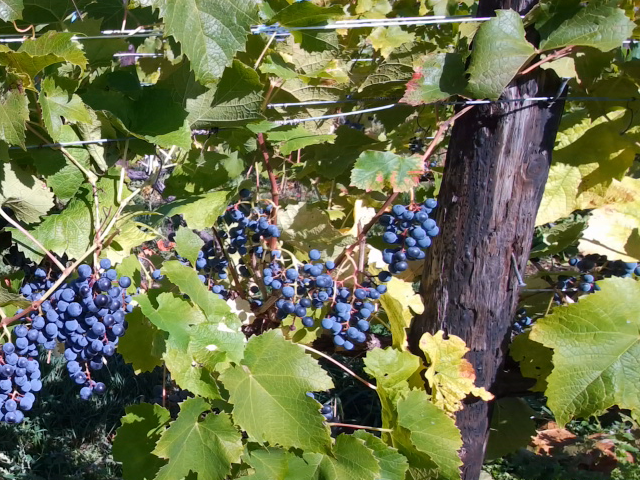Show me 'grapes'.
Masks as SVG:
<instances>
[{
  "instance_id": "grapes-1",
  "label": "grapes",
  "mask_w": 640,
  "mask_h": 480,
  "mask_svg": "<svg viewBox=\"0 0 640 480\" xmlns=\"http://www.w3.org/2000/svg\"><path fill=\"white\" fill-rule=\"evenodd\" d=\"M100 266L107 271L96 281V289L106 295L94 297V286L89 284L93 268L87 264L77 267L73 281L62 284L53 295L42 304L44 317L37 311L30 313L31 329L24 324L16 325L13 333L17 336L15 345L6 342L1 346L7 364L0 366V421L18 423L24 419V413L17 409L13 398H8L14 384L20 386V407L25 411L33 408L36 396L42 388L41 369L37 344L46 350L56 347V341L65 343L64 356L69 376L77 385L87 382L82 364L77 362L78 355L89 362L93 370L104 367L102 353L115 354L118 337L127 329L125 315L133 310L131 295L124 288L131 284L126 276L119 278L122 288L112 287L110 280L117 278V271L111 268V260L104 258Z\"/></svg>"
},
{
  "instance_id": "grapes-2",
  "label": "grapes",
  "mask_w": 640,
  "mask_h": 480,
  "mask_svg": "<svg viewBox=\"0 0 640 480\" xmlns=\"http://www.w3.org/2000/svg\"><path fill=\"white\" fill-rule=\"evenodd\" d=\"M439 206L437 199H427L420 206V211L407 209L405 204H395L393 212L385 217L387 229L384 232V242L386 244L396 243L399 233L403 229L409 228V235L406 239V252L402 248H384L382 250V261L388 265V270H382L377 274V279L381 282H390L392 274H399L408 269V260L419 261L425 257V252L432 245V237L440 234V227L434 218H430V213Z\"/></svg>"
},
{
  "instance_id": "grapes-3",
  "label": "grapes",
  "mask_w": 640,
  "mask_h": 480,
  "mask_svg": "<svg viewBox=\"0 0 640 480\" xmlns=\"http://www.w3.org/2000/svg\"><path fill=\"white\" fill-rule=\"evenodd\" d=\"M280 270V263L278 261H271L267 268H263L261 270V276L263 279V284L265 286H270L275 290H280L282 288V294L285 297H292L294 295V289L289 286H284L286 283H293V280H297L301 285V288H304L305 283L317 285L318 287H323V291L314 292L312 294V301L307 298H302L298 303H291L290 301H284L283 299H278L276 301V306L279 308L277 312V317L279 319H284L286 314L294 313L297 317H304L302 319V324L306 327H312L314 325V319L311 316L306 315V308H310L313 306L317 309H323L325 307V301L328 297H332L334 295V283L333 278L330 274H326L322 272L324 270V265L322 263H317L316 265L306 264L304 266V271L306 273H310L311 276L315 277V281H310V279H298L299 273H302L301 267L296 269H287L285 271L286 281H282L277 278H272L274 272H278Z\"/></svg>"
},
{
  "instance_id": "grapes-4",
  "label": "grapes",
  "mask_w": 640,
  "mask_h": 480,
  "mask_svg": "<svg viewBox=\"0 0 640 480\" xmlns=\"http://www.w3.org/2000/svg\"><path fill=\"white\" fill-rule=\"evenodd\" d=\"M350 297V290L346 286H340L336 290L334 306L335 315L330 319L323 318L321 320V328L323 330H331L333 341L336 346H343L347 351L355 348V343H363L366 335L363 331H367L370 322L367 319L371 313L375 311V306L371 302L356 301L354 308L359 313L351 315V305L346 303Z\"/></svg>"
},
{
  "instance_id": "grapes-5",
  "label": "grapes",
  "mask_w": 640,
  "mask_h": 480,
  "mask_svg": "<svg viewBox=\"0 0 640 480\" xmlns=\"http://www.w3.org/2000/svg\"><path fill=\"white\" fill-rule=\"evenodd\" d=\"M229 216L236 222L237 227L229 231V236L231 237V244L227 247L229 254H234L236 251H238L240 255H246L248 253V248L243 246L248 241V236L244 234V227L253 226L255 233L265 232L275 238L281 236V231L275 224L267 223L268 217L266 215H260L258 220L254 221L252 218H247L243 210H240L238 207H233L229 210Z\"/></svg>"
},
{
  "instance_id": "grapes-6",
  "label": "grapes",
  "mask_w": 640,
  "mask_h": 480,
  "mask_svg": "<svg viewBox=\"0 0 640 480\" xmlns=\"http://www.w3.org/2000/svg\"><path fill=\"white\" fill-rule=\"evenodd\" d=\"M34 276L41 280L36 283H26L21 289V294L31 301L41 298L45 292L55 283L53 278L47 277V269L44 266H38L34 271Z\"/></svg>"
},
{
  "instance_id": "grapes-7",
  "label": "grapes",
  "mask_w": 640,
  "mask_h": 480,
  "mask_svg": "<svg viewBox=\"0 0 640 480\" xmlns=\"http://www.w3.org/2000/svg\"><path fill=\"white\" fill-rule=\"evenodd\" d=\"M196 265L199 269H205L206 267L213 268V272L217 274L219 279H226L228 277V272L226 270H222V268H226L228 266V261L220 258H208V253L206 251H200L198 253Z\"/></svg>"
},
{
  "instance_id": "grapes-8",
  "label": "grapes",
  "mask_w": 640,
  "mask_h": 480,
  "mask_svg": "<svg viewBox=\"0 0 640 480\" xmlns=\"http://www.w3.org/2000/svg\"><path fill=\"white\" fill-rule=\"evenodd\" d=\"M387 292V287L385 285H379L376 289L373 288V285L369 282H363L361 284V288H357L354 291V296L359 300H364L367 297L370 300H378L380 295H383Z\"/></svg>"
},
{
  "instance_id": "grapes-9",
  "label": "grapes",
  "mask_w": 640,
  "mask_h": 480,
  "mask_svg": "<svg viewBox=\"0 0 640 480\" xmlns=\"http://www.w3.org/2000/svg\"><path fill=\"white\" fill-rule=\"evenodd\" d=\"M515 319L511 322V327L516 333H521L524 327H527L532 323V318L526 316V310L519 308L515 311Z\"/></svg>"
},
{
  "instance_id": "grapes-10",
  "label": "grapes",
  "mask_w": 640,
  "mask_h": 480,
  "mask_svg": "<svg viewBox=\"0 0 640 480\" xmlns=\"http://www.w3.org/2000/svg\"><path fill=\"white\" fill-rule=\"evenodd\" d=\"M569 265L571 267H578L580 271H587L594 267L593 260L589 257L583 258L582 260H578L576 257H571L569 260Z\"/></svg>"
}]
</instances>
